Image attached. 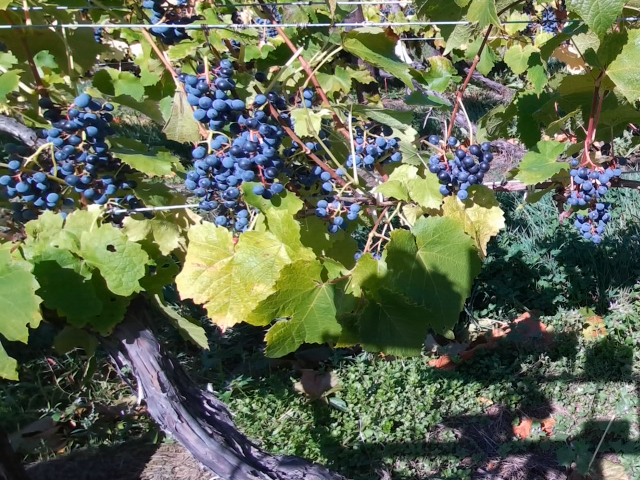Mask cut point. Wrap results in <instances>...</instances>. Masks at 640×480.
Wrapping results in <instances>:
<instances>
[{
    "mask_svg": "<svg viewBox=\"0 0 640 480\" xmlns=\"http://www.w3.org/2000/svg\"><path fill=\"white\" fill-rule=\"evenodd\" d=\"M459 105H460V107H461L462 111L464 112V116H465V118H466V122H467L468 127H472V124H471V122H470V120H469V116H468L467 110H466V108H465V106H464V104H463V102H462V98H461V100H460Z\"/></svg>",
    "mask_w": 640,
    "mask_h": 480,
    "instance_id": "1",
    "label": "cut point"
}]
</instances>
